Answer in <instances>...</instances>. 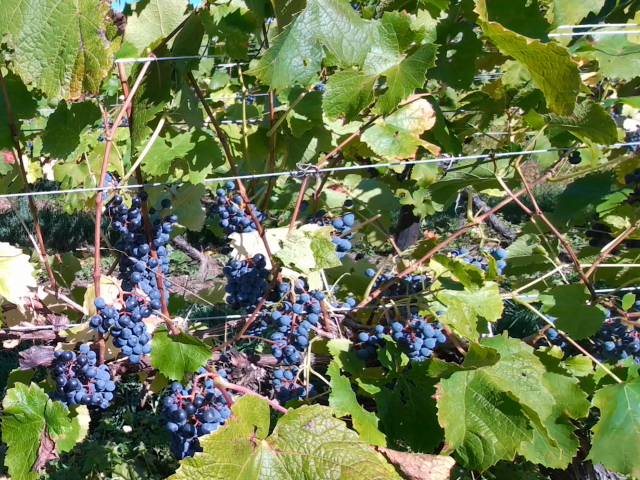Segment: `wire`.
Returning a JSON list of instances; mask_svg holds the SVG:
<instances>
[{
  "mask_svg": "<svg viewBox=\"0 0 640 480\" xmlns=\"http://www.w3.org/2000/svg\"><path fill=\"white\" fill-rule=\"evenodd\" d=\"M179 185L178 181L169 183H131L120 186H95L90 188L67 189L57 191H21L15 193H0V198H17L23 196H59L69 194L92 193L97 191H122L133 188H171Z\"/></svg>",
  "mask_w": 640,
  "mask_h": 480,
  "instance_id": "wire-2",
  "label": "wire"
},
{
  "mask_svg": "<svg viewBox=\"0 0 640 480\" xmlns=\"http://www.w3.org/2000/svg\"><path fill=\"white\" fill-rule=\"evenodd\" d=\"M622 26L640 27V22L620 21V22L568 23V24H559L558 28L559 29H570V28L622 27Z\"/></svg>",
  "mask_w": 640,
  "mask_h": 480,
  "instance_id": "wire-6",
  "label": "wire"
},
{
  "mask_svg": "<svg viewBox=\"0 0 640 480\" xmlns=\"http://www.w3.org/2000/svg\"><path fill=\"white\" fill-rule=\"evenodd\" d=\"M211 57H224L226 59L230 58V55L227 52H209L204 54H194L188 56H179V57H144V56H131V57H123L116 58V63H125V62H134V61H142V62H181V61H190L196 59H206Z\"/></svg>",
  "mask_w": 640,
  "mask_h": 480,
  "instance_id": "wire-3",
  "label": "wire"
},
{
  "mask_svg": "<svg viewBox=\"0 0 640 480\" xmlns=\"http://www.w3.org/2000/svg\"><path fill=\"white\" fill-rule=\"evenodd\" d=\"M568 152L569 148L567 146H559L549 149H522V150H511V151H498L491 152L485 154H477V155H465L458 156L456 158H422V159H414L412 161H387V162H377L368 165H357V166H328L321 168H313V169H301L296 171H280V172H261V173H253L251 175L245 176H214L205 179L206 183L216 182V181H247L253 180L256 178L263 177H282V176H298L303 175L306 172L310 174L315 173H323L330 171H359V170H370L379 167H389V166H414L416 164H424V163H458L460 161L467 160H479V159H487L493 157L500 156H513V155H524V154H551L556 152Z\"/></svg>",
  "mask_w": 640,
  "mask_h": 480,
  "instance_id": "wire-1",
  "label": "wire"
},
{
  "mask_svg": "<svg viewBox=\"0 0 640 480\" xmlns=\"http://www.w3.org/2000/svg\"><path fill=\"white\" fill-rule=\"evenodd\" d=\"M394 304L393 303H388L386 305L382 304V303H377V304H372V305H367V306H345V307H330L329 311L330 312H348V311H369V310H374V309H390L393 308Z\"/></svg>",
  "mask_w": 640,
  "mask_h": 480,
  "instance_id": "wire-8",
  "label": "wire"
},
{
  "mask_svg": "<svg viewBox=\"0 0 640 480\" xmlns=\"http://www.w3.org/2000/svg\"><path fill=\"white\" fill-rule=\"evenodd\" d=\"M250 314H216L207 315L201 317H189V318H172V323H191V322H203L218 319H250Z\"/></svg>",
  "mask_w": 640,
  "mask_h": 480,
  "instance_id": "wire-7",
  "label": "wire"
},
{
  "mask_svg": "<svg viewBox=\"0 0 640 480\" xmlns=\"http://www.w3.org/2000/svg\"><path fill=\"white\" fill-rule=\"evenodd\" d=\"M82 322L68 323V324H48L44 326H31V325H15L10 327H1V332H12L17 330H29V331H46L51 329H70L82 327Z\"/></svg>",
  "mask_w": 640,
  "mask_h": 480,
  "instance_id": "wire-5",
  "label": "wire"
},
{
  "mask_svg": "<svg viewBox=\"0 0 640 480\" xmlns=\"http://www.w3.org/2000/svg\"><path fill=\"white\" fill-rule=\"evenodd\" d=\"M590 35H636L640 36L638 30H588V31H558L550 32V38L560 36H590Z\"/></svg>",
  "mask_w": 640,
  "mask_h": 480,
  "instance_id": "wire-4",
  "label": "wire"
}]
</instances>
